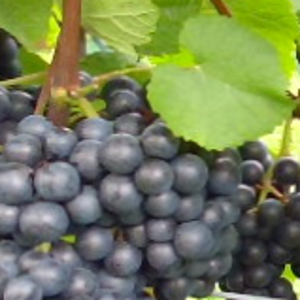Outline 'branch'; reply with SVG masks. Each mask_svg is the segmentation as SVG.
<instances>
[{
	"label": "branch",
	"mask_w": 300,
	"mask_h": 300,
	"mask_svg": "<svg viewBox=\"0 0 300 300\" xmlns=\"http://www.w3.org/2000/svg\"><path fill=\"white\" fill-rule=\"evenodd\" d=\"M81 23V0H62V28L54 49L49 79L37 95L34 115L44 113L50 99L48 120L54 126L68 127L73 105L59 99L55 92L63 88L78 96L81 88L80 58L85 53L86 35Z\"/></svg>",
	"instance_id": "30e6481e"
}]
</instances>
